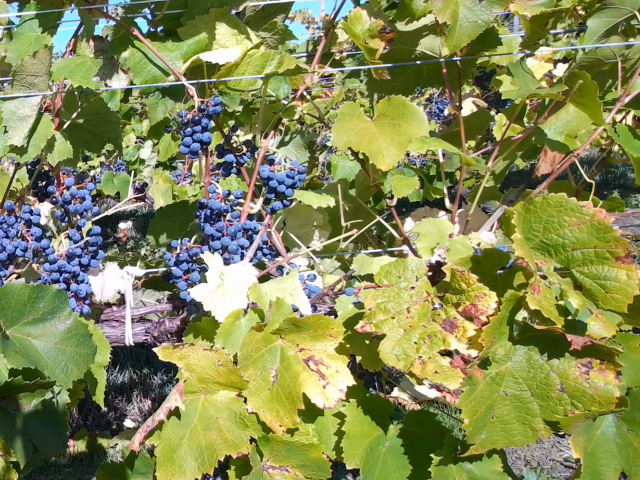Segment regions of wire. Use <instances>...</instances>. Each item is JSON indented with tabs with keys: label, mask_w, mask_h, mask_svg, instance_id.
<instances>
[{
	"label": "wire",
	"mask_w": 640,
	"mask_h": 480,
	"mask_svg": "<svg viewBox=\"0 0 640 480\" xmlns=\"http://www.w3.org/2000/svg\"><path fill=\"white\" fill-rule=\"evenodd\" d=\"M408 249H409L408 245L390 246V247H381V248H373V249H361V250H354V251L326 253V254H321L320 258L328 259V258H334V257L356 256V255L375 254V253L392 252V251H407Z\"/></svg>",
	"instance_id": "obj_3"
},
{
	"label": "wire",
	"mask_w": 640,
	"mask_h": 480,
	"mask_svg": "<svg viewBox=\"0 0 640 480\" xmlns=\"http://www.w3.org/2000/svg\"><path fill=\"white\" fill-rule=\"evenodd\" d=\"M640 45V40L634 41H619L605 44H580V45H557V46H544L540 48H528L518 50H505L498 52H490L484 55H470L465 57H451V58H434V59H422L413 61H379V62H367L359 63L348 66H334L331 68H316L304 71H288L280 73H255V74H243L232 77H213V78H194L189 79V84L196 83H215V82H234L245 79H268V78H282L290 76H306L318 73H333L336 71H350L361 68L369 67H381V66H415L424 64H436V63H453V62H468L471 60H486L492 57H500L507 55H520L530 53H542L546 51H560V50H582V49H607L621 46H636Z\"/></svg>",
	"instance_id": "obj_1"
},
{
	"label": "wire",
	"mask_w": 640,
	"mask_h": 480,
	"mask_svg": "<svg viewBox=\"0 0 640 480\" xmlns=\"http://www.w3.org/2000/svg\"><path fill=\"white\" fill-rule=\"evenodd\" d=\"M181 85L182 81L179 79H172L166 82H148L143 84H133V85H109L105 87H95L90 89H80V90H69V91H18L11 92L9 94H0V99H11L13 97L20 96H71V95H82V94H92L97 92H107L111 90H136V89H145L150 87L162 88L168 87L171 85Z\"/></svg>",
	"instance_id": "obj_2"
}]
</instances>
